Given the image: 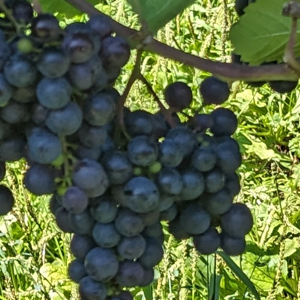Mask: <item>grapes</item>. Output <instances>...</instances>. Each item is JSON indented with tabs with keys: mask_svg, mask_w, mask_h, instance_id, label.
<instances>
[{
	"mask_svg": "<svg viewBox=\"0 0 300 300\" xmlns=\"http://www.w3.org/2000/svg\"><path fill=\"white\" fill-rule=\"evenodd\" d=\"M29 0H0V181L5 161L32 164L26 187L54 193L57 227L74 234L67 267L84 300H133L121 287H144L163 257L160 220L173 236H193L197 251L243 252L252 213L233 204L240 147L230 138L235 114L218 108L227 81L204 79L202 98L181 121L192 92L183 82L164 92L154 114L118 105L113 87L130 45L111 36L102 14L61 28L55 15L31 18Z\"/></svg>",
	"mask_w": 300,
	"mask_h": 300,
	"instance_id": "1",
	"label": "grapes"
}]
</instances>
